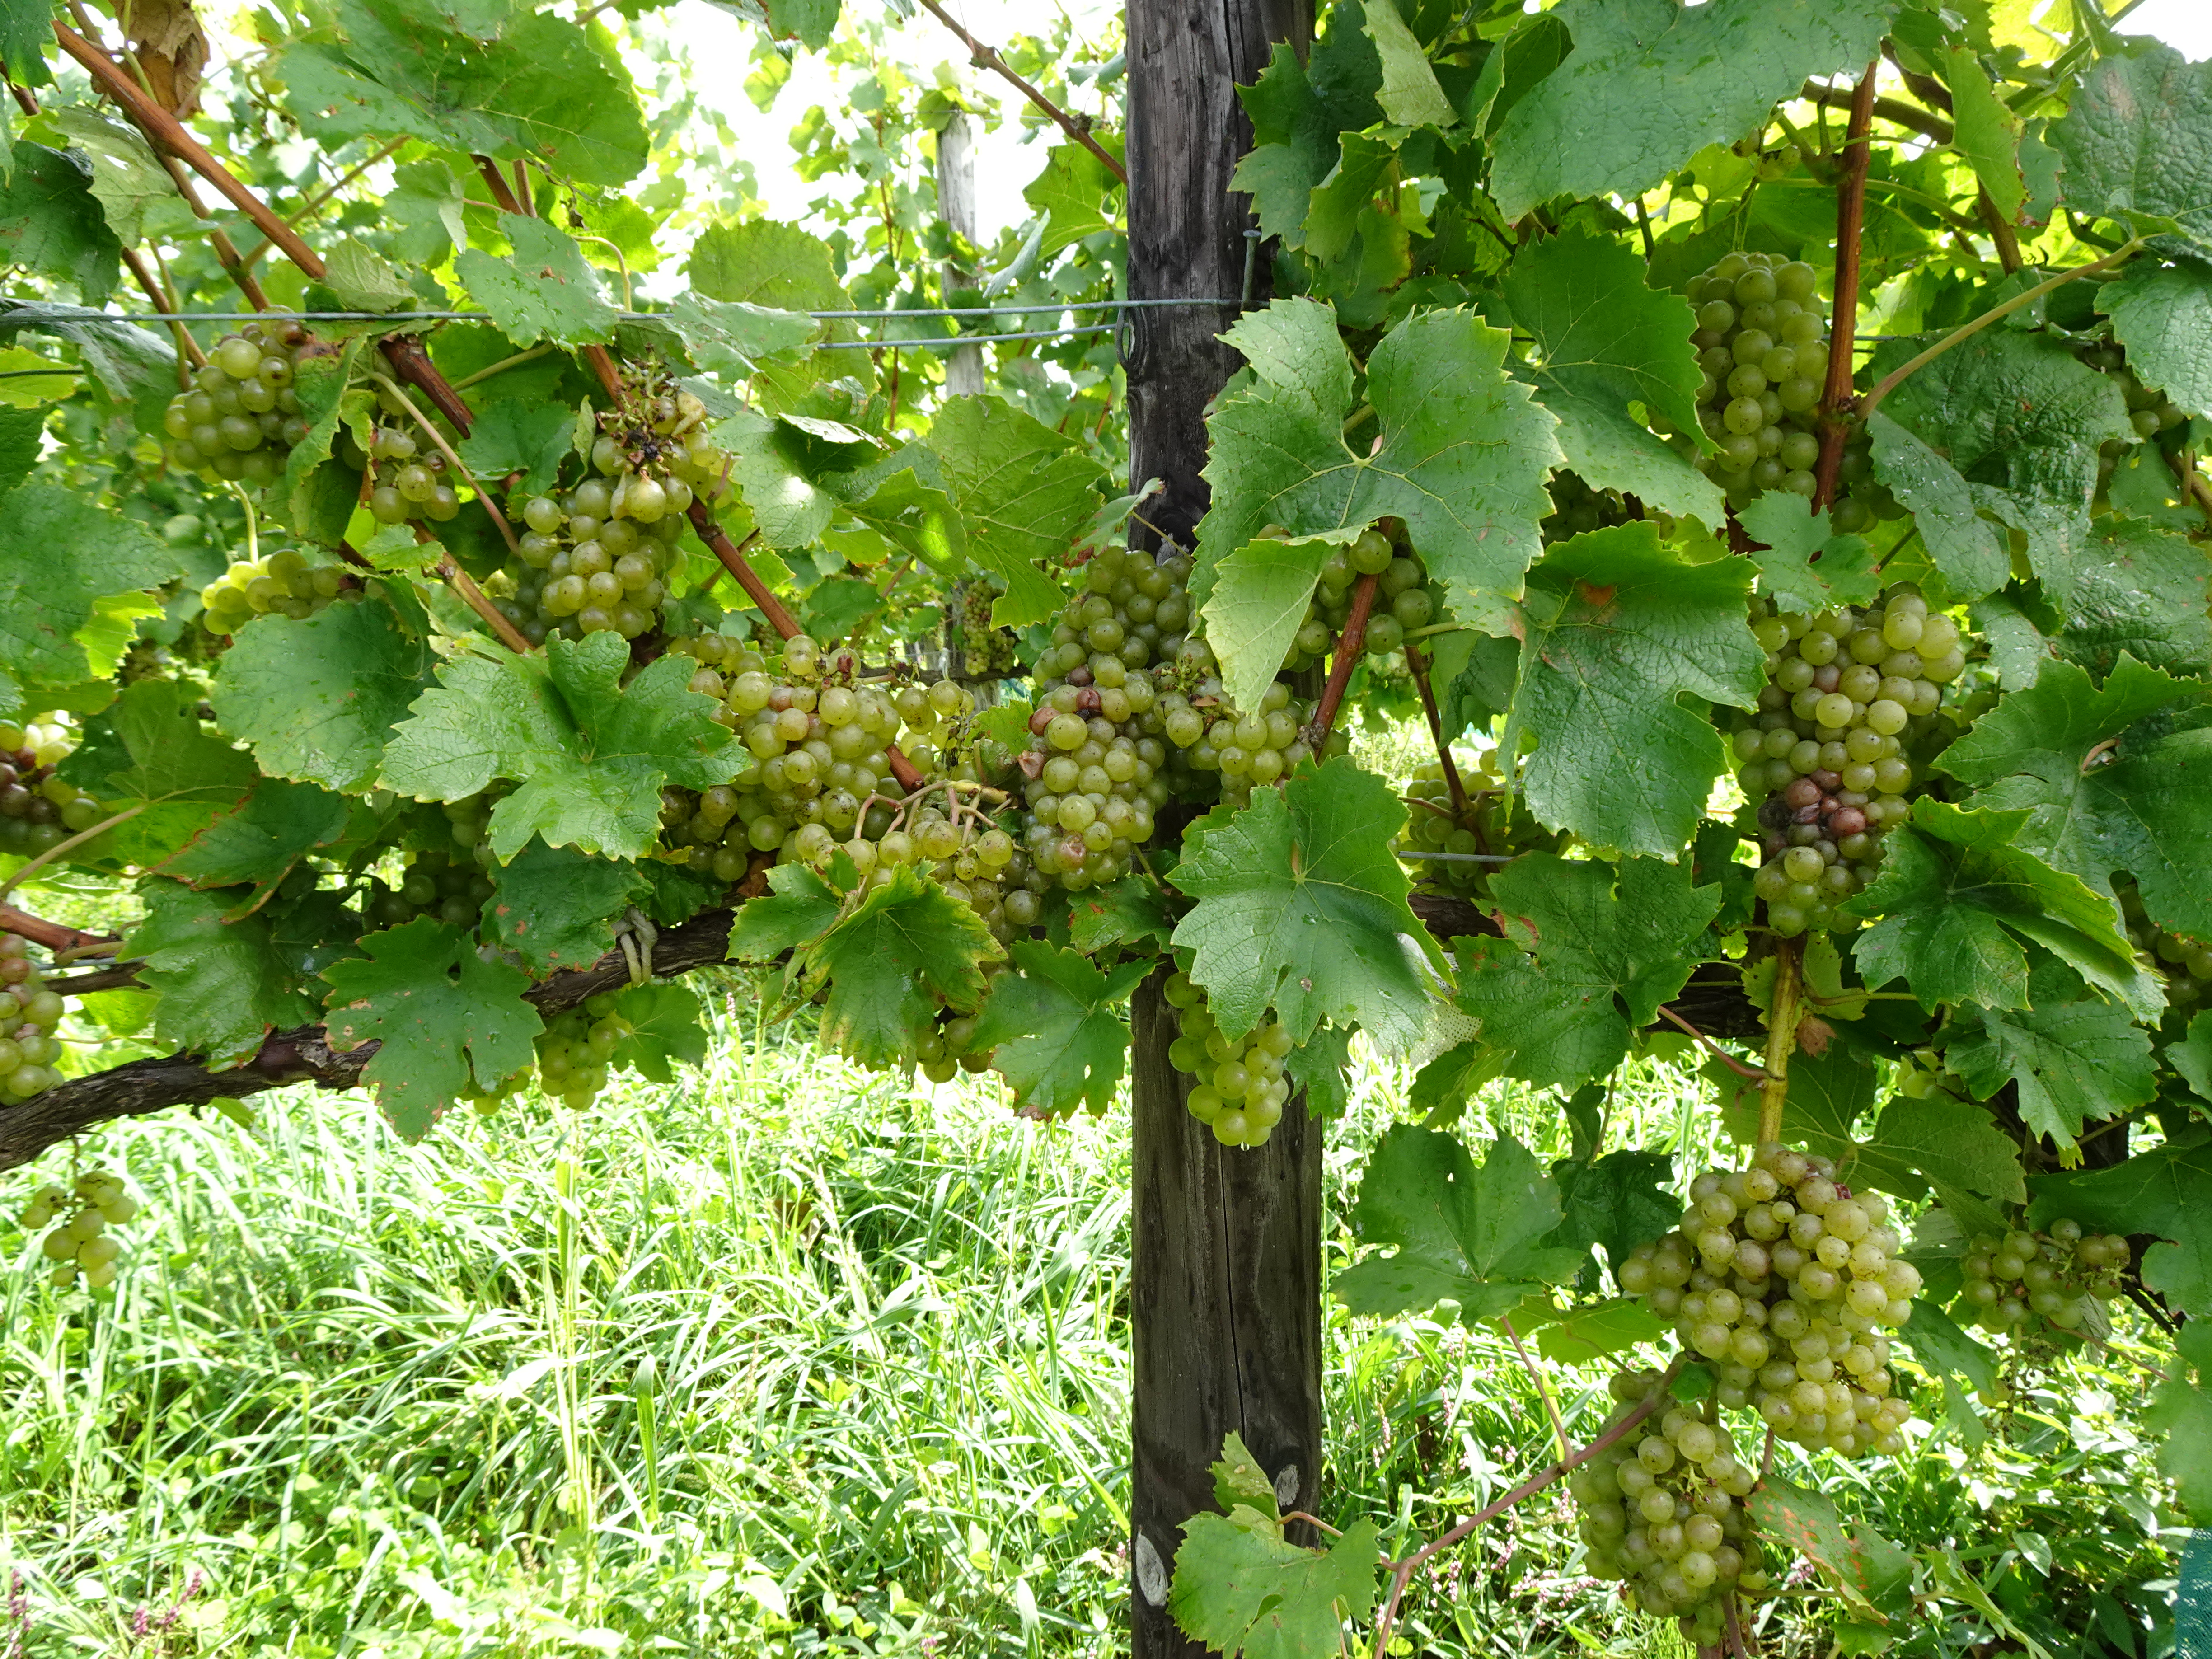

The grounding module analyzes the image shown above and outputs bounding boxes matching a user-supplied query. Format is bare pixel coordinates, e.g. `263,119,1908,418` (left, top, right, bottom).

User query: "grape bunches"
1,720,105,861
1963,1218,2127,1336
1164,744,1221,794
2116,883,2212,1005
658,634,767,883
1152,638,1349,811
1164,973,1293,1146
897,681,977,780
1388,749,1525,902
488,563,586,647
1649,253,1831,512
539,982,633,1111
1031,546,1194,688
0,935,63,1107
1618,1150,1922,1459
442,778,509,870
1829,419,1908,533
592,388,735,523
844,808,1051,1082
22,1170,135,1288
1536,467,1677,548
1281,531,1434,672
375,848,497,930
519,477,687,639
2083,337,2185,490
163,305,336,485
201,549,431,642
1570,1368,1767,1646
342,386,458,525
457,1064,534,1115
1895,1049,1964,1099
1020,656,1168,891
1735,581,1965,941
729,634,902,864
